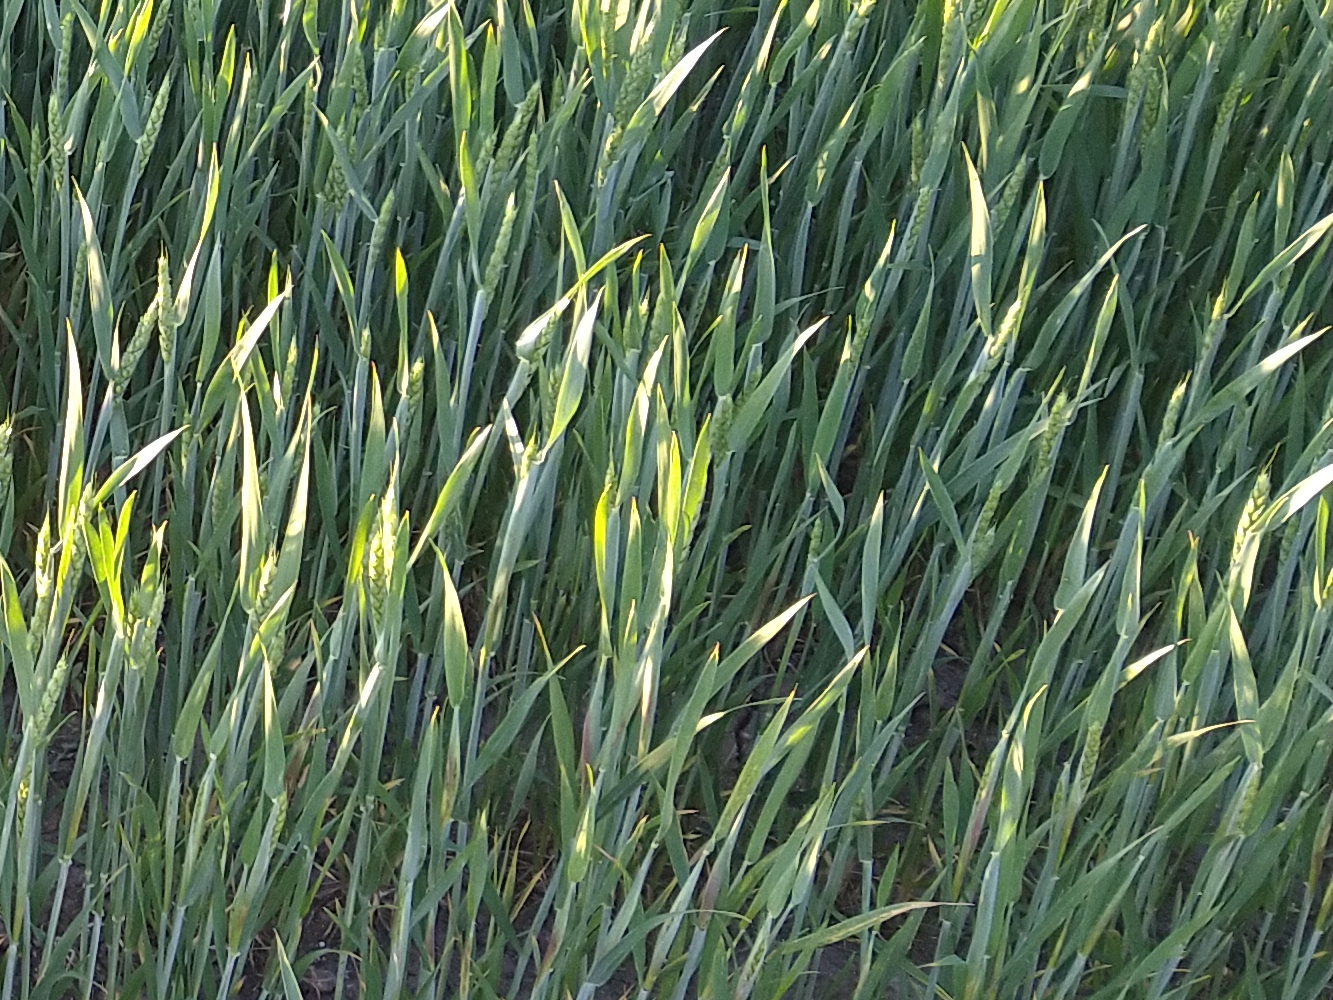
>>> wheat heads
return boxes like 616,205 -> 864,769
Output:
675,0 -> 693,20
111,292 -> 170,400
247,549 -> 273,641
260,471 -> 271,505
27,578 -> 52,653
810,518 -> 821,559
510,78 -> 539,175
541,365 -> 564,439
125,589 -> 143,656
192,778 -> 206,829
1156,372 -> 1186,457
50,97 -> 64,190
373,18 -> 388,55
1231,399 -> 1247,431
1216,72 -> 1245,131
597,128 -> 622,187
371,531 -> 388,637
353,45 -> 368,110
532,312 -> 557,371
1037,388 -> 1068,473
361,328 -> 373,356
520,442 -> 535,477
33,656 -> 67,743
976,747 -> 996,803
293,439 -> 304,479
1138,70 -> 1164,151
606,466 -> 618,505
336,124 -> 348,214
694,283 -> 709,327
731,366 -> 760,420
1124,20 -> 1159,128
303,83 -> 314,139
267,630 -> 283,677
28,124 -> 42,182
666,36 -> 686,70
37,529 -> 50,575
210,472 -> 227,530
1077,0 -> 1130,26
408,357 -> 423,422
137,76 -> 169,167
981,298 -> 1024,384
1053,779 -> 1063,816
1234,766 -> 1258,832
487,116 -> 522,196
715,144 -> 729,183
741,938 -> 766,984
370,186 -> 394,260
67,482 -> 96,585
143,589 -> 167,658
57,13 -> 75,90
1232,471 -> 1273,558
444,511 -> 455,541
483,197 -> 515,290
1197,294 -> 1228,365
640,297 -> 648,336
971,480 -> 1003,538
350,136 -> 357,168
1211,0 -> 1246,74
145,0 -> 170,60
322,154 -> 338,215
186,0 -> 201,30
16,774 -> 27,831
1086,0 -> 1110,56
648,295 -> 664,354
406,64 -> 418,100
73,243 -> 86,317
847,0 -> 898,43
268,792 -> 291,853
181,409 -> 192,475
935,0 -> 959,81
1278,510 -> 1300,566
282,339 -> 297,398
246,72 -> 258,136
988,156 -> 1021,233
911,112 -> 922,186
711,396 -> 730,460
1080,717 -> 1097,782
154,240 -> 176,360
602,0 -> 616,57
904,189 -> 934,258
475,132 -> 498,184
965,0 -> 1001,38
613,24 -> 655,123
847,319 -> 866,370
0,453 -> 14,503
